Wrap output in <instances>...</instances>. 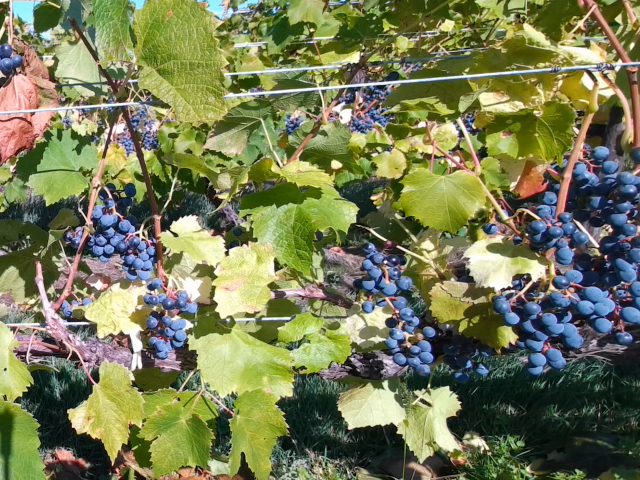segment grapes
<instances>
[{
    "mask_svg": "<svg viewBox=\"0 0 640 480\" xmlns=\"http://www.w3.org/2000/svg\"><path fill=\"white\" fill-rule=\"evenodd\" d=\"M610 156L611 151L607 146H597L591 150V158L602 162L601 172L605 174L603 178L587 169V165L582 161H576L573 167L574 182L578 185L579 193H586L588 190L606 193L608 189H614L621 197L616 200L596 193L588 196L589 206L600 209L602 214L593 216L590 226L602 228L611 223L615 227L612 235H606L600 241V250L608 254L610 261L592 260L589 253H578L574 257V251L565 239L567 235L572 236L577 246H584L589 241V236L573 223L572 212L558 214V221L554 218L560 184L551 180L547 191L538 194L540 204L534 207V213L540 216L541 220L532 221L526 226L527 238L531 239L529 247L533 251H540L556 246V262L560 265H573V270L553 277V285L557 289L569 288L575 282L587 287L564 297L561 291H553L543 300L528 301L524 305L527 316L522 321L521 316L513 310L507 295L493 296L494 310L504 314V321L508 325H517L520 322V327L526 334L516 339V345L520 349L530 348L533 351L528 354V362L525 364V371L531 376H539L547 363L555 370H563L566 367V358L559 349H545L543 353L539 352L550 337L562 335L563 342L568 347L584 346L583 336L571 322L570 311L559 310L540 317L543 309L555 306L569 307L573 303L578 306L581 314L588 316L591 326L596 331L610 333L614 324L607 317L615 311V301L610 299L608 286H616V295L626 298L628 291L623 285L625 281L631 282L629 293L634 306L622 304L619 308L620 316L631 324L640 323V236H634L637 225L627 223V220L639 215V209L634 207L633 201L640 199V177L630 171L617 172L618 162L606 160Z\"/></svg>",
    "mask_w": 640,
    "mask_h": 480,
    "instance_id": "01657485",
    "label": "grapes"
},
{
    "mask_svg": "<svg viewBox=\"0 0 640 480\" xmlns=\"http://www.w3.org/2000/svg\"><path fill=\"white\" fill-rule=\"evenodd\" d=\"M114 205L113 198H106L104 205L95 206L92 217L103 226L102 234L89 235L86 238V244L92 246V254L98 257L102 264L111 260L113 252H118L124 260L121 269L126 271V280L129 283L136 282L138 274L141 281H147L150 273L155 270L153 265L157 263L156 240L151 238L149 244L146 241H140L138 236H131L124 240L130 233L136 231L137 218L127 216L119 222L116 214H104L105 207L112 208Z\"/></svg>",
    "mask_w": 640,
    "mask_h": 480,
    "instance_id": "b958b902",
    "label": "grapes"
},
{
    "mask_svg": "<svg viewBox=\"0 0 640 480\" xmlns=\"http://www.w3.org/2000/svg\"><path fill=\"white\" fill-rule=\"evenodd\" d=\"M392 305L399 311V316L404 323L402 330L398 329V320L396 318H389L385 321V326L389 328V335L385 338V345L391 349L394 354L393 359L398 366H406L409 364L414 371L422 377H428L431 374V367L428 364L435 362V357L431 353L432 344L427 340H420L416 345L409 347L411 353L408 357L401 352V346L399 342L405 340L404 332L413 334L416 327L421 324V318L416 316V312L407 307L408 300L401 296H396L392 300Z\"/></svg>",
    "mask_w": 640,
    "mask_h": 480,
    "instance_id": "0513c4c2",
    "label": "grapes"
},
{
    "mask_svg": "<svg viewBox=\"0 0 640 480\" xmlns=\"http://www.w3.org/2000/svg\"><path fill=\"white\" fill-rule=\"evenodd\" d=\"M362 251L367 253L366 259L362 261V267L366 272H369L371 278H356L354 287L357 290L394 296L398 293V289L408 291L413 287L412 277L408 274H401L400 267L406 264V256L404 254H385L371 242H366L362 246ZM383 261L387 267H390L388 269V277L395 283H388L384 279L383 270L377 266Z\"/></svg>",
    "mask_w": 640,
    "mask_h": 480,
    "instance_id": "84f90ec7",
    "label": "grapes"
},
{
    "mask_svg": "<svg viewBox=\"0 0 640 480\" xmlns=\"http://www.w3.org/2000/svg\"><path fill=\"white\" fill-rule=\"evenodd\" d=\"M159 321L166 326L165 328H161L159 333L162 336L166 335L167 337L173 338L165 341L164 339H159L157 336H151L148 344L157 349L156 356L158 358H166L169 350L181 348L187 339V333L183 330L186 327V320L184 318H175L172 320L168 314L153 311L146 319V325L150 329H156L159 326Z\"/></svg>",
    "mask_w": 640,
    "mask_h": 480,
    "instance_id": "f8a65327",
    "label": "grapes"
},
{
    "mask_svg": "<svg viewBox=\"0 0 640 480\" xmlns=\"http://www.w3.org/2000/svg\"><path fill=\"white\" fill-rule=\"evenodd\" d=\"M174 301L172 298H169L165 293L156 294H146L144 296V302L147 305H158L161 303V306L171 312L175 308L178 309L180 313H197L199 311V305L196 301H189V295L186 291H179L175 294Z\"/></svg>",
    "mask_w": 640,
    "mask_h": 480,
    "instance_id": "5460f4e3",
    "label": "grapes"
},
{
    "mask_svg": "<svg viewBox=\"0 0 640 480\" xmlns=\"http://www.w3.org/2000/svg\"><path fill=\"white\" fill-rule=\"evenodd\" d=\"M491 354V349L487 346H483L482 344H475L470 349L465 351V356L463 354H458L456 356L457 367L460 370H474L479 375H487L489 373V366L485 363H473L472 358H477L479 355L489 356Z\"/></svg>",
    "mask_w": 640,
    "mask_h": 480,
    "instance_id": "83cd7487",
    "label": "grapes"
},
{
    "mask_svg": "<svg viewBox=\"0 0 640 480\" xmlns=\"http://www.w3.org/2000/svg\"><path fill=\"white\" fill-rule=\"evenodd\" d=\"M13 47L9 44L0 45V71L7 73L13 69V67L19 66L23 62L22 55H14L12 58L11 53Z\"/></svg>",
    "mask_w": 640,
    "mask_h": 480,
    "instance_id": "e5b3c951",
    "label": "grapes"
},
{
    "mask_svg": "<svg viewBox=\"0 0 640 480\" xmlns=\"http://www.w3.org/2000/svg\"><path fill=\"white\" fill-rule=\"evenodd\" d=\"M81 235H82V229L80 227H77L75 229V232H65L63 234V238L66 241L71 242V246L73 248H78V243L80 242L81 239Z\"/></svg>",
    "mask_w": 640,
    "mask_h": 480,
    "instance_id": "2adb6a1f",
    "label": "grapes"
}]
</instances>
